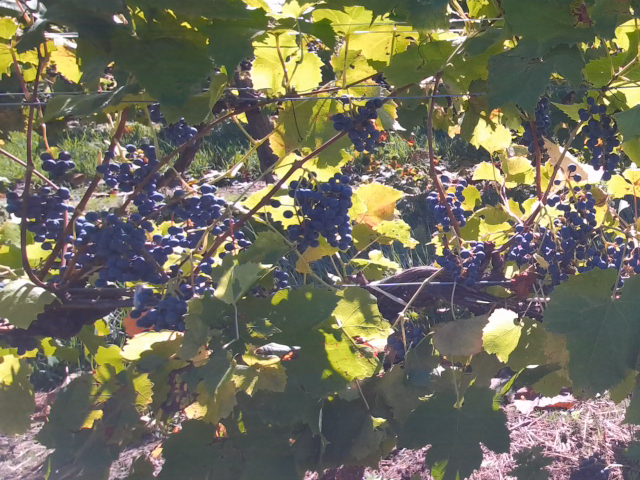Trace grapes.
<instances>
[{
  "label": "grapes",
  "instance_id": "grapes-1",
  "mask_svg": "<svg viewBox=\"0 0 640 480\" xmlns=\"http://www.w3.org/2000/svg\"><path fill=\"white\" fill-rule=\"evenodd\" d=\"M160 178L159 173H154L148 183L144 185V192L133 199V204L138 208V213L130 215L132 223L121 221L114 213L104 214V228L98 229L93 221L99 219L97 212H88L85 219H79L76 224L77 238L73 241L76 247L86 246L90 240L94 244L85 247V250L77 258L74 264L76 270L83 269L85 263L95 260L105 261L106 269L99 271V278L94 281L96 287H105L107 282L124 283L125 281L136 284L138 281L148 282L151 285H165L172 277L168 272L164 277L156 273L153 263H146L142 257H137L145 248L150 256L163 266L168 259L167 255L173 253V248L195 249L204 230L190 233L187 237L183 234L182 227L171 226L168 229L169 236L154 234L153 242H146V232L155 230L153 223L143 221L155 211L156 202H161L164 195L156 192V182Z\"/></svg>",
  "mask_w": 640,
  "mask_h": 480
},
{
  "label": "grapes",
  "instance_id": "grapes-2",
  "mask_svg": "<svg viewBox=\"0 0 640 480\" xmlns=\"http://www.w3.org/2000/svg\"><path fill=\"white\" fill-rule=\"evenodd\" d=\"M349 177L341 175L340 172L333 174L328 183H321L319 188L322 191H329L325 197L321 191H314L313 185L306 179L301 181L302 188L296 180H291L288 186L292 188L288 192L290 198L297 197L298 203L305 216L310 217L299 224H289L287 226V240L290 243L297 242V251L305 254L307 249L318 248L320 242L317 240L319 233L325 240H328L330 247H338L341 251H346L353 241L352 228L348 221L347 214L352 207L351 197L353 188L347 185ZM296 202V206H299Z\"/></svg>",
  "mask_w": 640,
  "mask_h": 480
},
{
  "label": "grapes",
  "instance_id": "grapes-3",
  "mask_svg": "<svg viewBox=\"0 0 640 480\" xmlns=\"http://www.w3.org/2000/svg\"><path fill=\"white\" fill-rule=\"evenodd\" d=\"M205 281L203 276H197L194 280V287L191 288L190 284L180 283L179 290L183 293L178 294L177 297H172L171 294L165 296L162 300V295L159 293H153V290L143 289L137 293V300L140 302V306L137 310H131L129 317L135 320V325L138 328L148 329L154 326L155 332H160L162 329H168L172 331H178L183 333L186 331V323L182 319V315H185L188 311V303L186 300L192 298L195 293L199 296H203L204 292H209L210 295L214 294V288L210 287L209 283H206L203 287L202 283Z\"/></svg>",
  "mask_w": 640,
  "mask_h": 480
},
{
  "label": "grapes",
  "instance_id": "grapes-4",
  "mask_svg": "<svg viewBox=\"0 0 640 480\" xmlns=\"http://www.w3.org/2000/svg\"><path fill=\"white\" fill-rule=\"evenodd\" d=\"M585 198L588 201H576L575 208L578 210L587 209L588 212L585 213V218L589 223H585V219L582 216H578L576 211H571L572 206L570 204L558 203L560 200L559 195H553L551 198L547 199V206L554 207L557 204V209L559 211H564V218L570 219L574 225H581V229L577 231H573L571 226H563L560 230L557 231V235L561 239L574 238L578 240L580 245L576 248V258L578 260H582L583 258L592 257V260L586 261V266H578V272H585L593 269L594 267H598L599 269H618L621 266V257L623 256L625 244L624 237L617 235L614 238V242L618 247V251H616L615 246L608 245L607 253L612 255V260L608 262L607 255L605 253L601 254L598 250H594L592 248H588L585 253V245L588 244V240L586 239V235H589L590 232L594 230V227L597 226L598 221L596 219L597 209L595 208L596 199L592 197L591 192L585 193Z\"/></svg>",
  "mask_w": 640,
  "mask_h": 480
},
{
  "label": "grapes",
  "instance_id": "grapes-5",
  "mask_svg": "<svg viewBox=\"0 0 640 480\" xmlns=\"http://www.w3.org/2000/svg\"><path fill=\"white\" fill-rule=\"evenodd\" d=\"M50 188L43 187L40 194H29L27 199L26 217L35 219L26 224V230L36 233L34 241L43 243L41 249L48 251L52 249L50 242L46 239L59 240L63 229V216L59 213L65 211L74 213L73 205H67L64 200L71 198V191L67 187H60L56 191V195H49Z\"/></svg>",
  "mask_w": 640,
  "mask_h": 480
},
{
  "label": "grapes",
  "instance_id": "grapes-6",
  "mask_svg": "<svg viewBox=\"0 0 640 480\" xmlns=\"http://www.w3.org/2000/svg\"><path fill=\"white\" fill-rule=\"evenodd\" d=\"M587 104L590 106L591 113H599L601 115L602 123L597 119L589 120V113L585 108H579L577 110V115L580 118L581 122H588L587 126H583L581 128V133L585 135L588 140L586 143V147L591 149L593 158L589 159V163L593 166L595 171H599L601 169V165L599 164L598 158L602 155V146L598 144V138L604 139L606 138V144L604 145V150L607 153H612L614 148H618L620 146V141L614 137V132L617 130L616 125H612L610 127L611 119L609 116H606L605 113L607 110V106L605 104H594V97L590 96L587 98ZM620 156L617 153H612L610 155V161L605 165V172L601 174V179L603 181H610L612 178V173L616 164L619 163Z\"/></svg>",
  "mask_w": 640,
  "mask_h": 480
},
{
  "label": "grapes",
  "instance_id": "grapes-7",
  "mask_svg": "<svg viewBox=\"0 0 640 480\" xmlns=\"http://www.w3.org/2000/svg\"><path fill=\"white\" fill-rule=\"evenodd\" d=\"M217 191L214 184L202 182L200 184L201 197H188L186 202L178 207L176 202L169 205V209L173 211L181 221L192 222V227L198 229L206 225H211L213 220L222 216L220 212L221 206L226 204L223 198L215 199L211 194Z\"/></svg>",
  "mask_w": 640,
  "mask_h": 480
},
{
  "label": "grapes",
  "instance_id": "grapes-8",
  "mask_svg": "<svg viewBox=\"0 0 640 480\" xmlns=\"http://www.w3.org/2000/svg\"><path fill=\"white\" fill-rule=\"evenodd\" d=\"M382 100H372L366 102V107H358V115L355 116L356 122L362 124L366 131L353 126L352 118L344 116L342 113H336L332 116L333 130L345 131L348 133L349 141L355 146L357 152H371L375 145V139L380 138V132L374 129L368 119H376L378 113L373 108H382Z\"/></svg>",
  "mask_w": 640,
  "mask_h": 480
},
{
  "label": "grapes",
  "instance_id": "grapes-9",
  "mask_svg": "<svg viewBox=\"0 0 640 480\" xmlns=\"http://www.w3.org/2000/svg\"><path fill=\"white\" fill-rule=\"evenodd\" d=\"M141 150L144 151L147 161H144V158L140 155L132 154L131 158L135 159L134 165L141 166L136 169L133 174L130 173L132 165L129 163L119 165L110 162L108 165H97L96 170L105 175L104 179L109 187H114L119 184L121 191L130 193L133 186L139 183L159 161V159L156 158L154 145L143 143Z\"/></svg>",
  "mask_w": 640,
  "mask_h": 480
},
{
  "label": "grapes",
  "instance_id": "grapes-10",
  "mask_svg": "<svg viewBox=\"0 0 640 480\" xmlns=\"http://www.w3.org/2000/svg\"><path fill=\"white\" fill-rule=\"evenodd\" d=\"M471 248L473 249L474 258L470 261L463 262V266L467 268L466 276L464 278H460L462 269L459 265H456V259L450 249H444V255L435 257L434 262L439 267H445L448 272H451V277L455 279L456 283H464L466 287H473L475 284V277L478 276L477 271L479 270V265L481 264V260L486 257V253L483 252V241H476L475 244L471 245Z\"/></svg>",
  "mask_w": 640,
  "mask_h": 480
},
{
  "label": "grapes",
  "instance_id": "grapes-11",
  "mask_svg": "<svg viewBox=\"0 0 640 480\" xmlns=\"http://www.w3.org/2000/svg\"><path fill=\"white\" fill-rule=\"evenodd\" d=\"M552 236V232L546 233L543 246L541 248V254L550 264L548 271L552 274V280L554 282H559L560 280L566 281L567 274L565 272H560L558 270V265L555 262L562 260V265L567 266L569 261H572L575 257L574 247L576 246V242L573 239L562 242L561 247L564 249V254H561L560 252L555 254L554 250L556 249V243L551 239Z\"/></svg>",
  "mask_w": 640,
  "mask_h": 480
},
{
  "label": "grapes",
  "instance_id": "grapes-12",
  "mask_svg": "<svg viewBox=\"0 0 640 480\" xmlns=\"http://www.w3.org/2000/svg\"><path fill=\"white\" fill-rule=\"evenodd\" d=\"M148 113L154 123H161L163 127V133L165 137L172 142L173 146H179L184 140L194 136L198 129L196 127L188 126L184 118H181L179 122L174 124L169 123L161 116L160 103L148 104Z\"/></svg>",
  "mask_w": 640,
  "mask_h": 480
},
{
  "label": "grapes",
  "instance_id": "grapes-13",
  "mask_svg": "<svg viewBox=\"0 0 640 480\" xmlns=\"http://www.w3.org/2000/svg\"><path fill=\"white\" fill-rule=\"evenodd\" d=\"M523 231V225L516 226L515 232L519 234L515 236V243L510 247V252L507 255V260L515 261L517 267L527 264L529 262V258L525 255L534 251V248L530 247L529 243L533 240V234L523 233Z\"/></svg>",
  "mask_w": 640,
  "mask_h": 480
},
{
  "label": "grapes",
  "instance_id": "grapes-14",
  "mask_svg": "<svg viewBox=\"0 0 640 480\" xmlns=\"http://www.w3.org/2000/svg\"><path fill=\"white\" fill-rule=\"evenodd\" d=\"M40 159L44 161L41 170L53 172L57 176H63L65 169L72 170L76 167V163L72 161L70 151L59 152L57 159L54 160L51 159V155L48 152H44L40 155Z\"/></svg>",
  "mask_w": 640,
  "mask_h": 480
},
{
  "label": "grapes",
  "instance_id": "grapes-15",
  "mask_svg": "<svg viewBox=\"0 0 640 480\" xmlns=\"http://www.w3.org/2000/svg\"><path fill=\"white\" fill-rule=\"evenodd\" d=\"M457 185L458 187L456 188L455 193L446 194V201L448 205L452 208L454 219L459 224V227H465L466 220H465V216L463 215L465 213V209L461 206H462V202L465 201V196L462 195V191H463V188L468 185V181L466 179H460L457 182Z\"/></svg>",
  "mask_w": 640,
  "mask_h": 480
},
{
  "label": "grapes",
  "instance_id": "grapes-16",
  "mask_svg": "<svg viewBox=\"0 0 640 480\" xmlns=\"http://www.w3.org/2000/svg\"><path fill=\"white\" fill-rule=\"evenodd\" d=\"M549 99L544 98L537 105L536 111V127H537V138L540 147L544 146V137L548 136V131L551 126L550 115L546 114L545 111L548 110Z\"/></svg>",
  "mask_w": 640,
  "mask_h": 480
},
{
  "label": "grapes",
  "instance_id": "grapes-17",
  "mask_svg": "<svg viewBox=\"0 0 640 480\" xmlns=\"http://www.w3.org/2000/svg\"><path fill=\"white\" fill-rule=\"evenodd\" d=\"M437 197H438V194L434 191H431L427 195V197L425 198V201L427 203V208L430 209L431 211H435V215H434L435 221L439 224H442L443 232H448L449 227L451 225L449 223L448 217L443 214L446 211V209H444L442 205H439V203L437 202Z\"/></svg>",
  "mask_w": 640,
  "mask_h": 480
},
{
  "label": "grapes",
  "instance_id": "grapes-18",
  "mask_svg": "<svg viewBox=\"0 0 640 480\" xmlns=\"http://www.w3.org/2000/svg\"><path fill=\"white\" fill-rule=\"evenodd\" d=\"M625 255L627 257H631L633 255V257L632 260H625L624 264L633 268L635 273H640V265H637L638 260L640 259V247L635 248V242L628 240Z\"/></svg>",
  "mask_w": 640,
  "mask_h": 480
},
{
  "label": "grapes",
  "instance_id": "grapes-19",
  "mask_svg": "<svg viewBox=\"0 0 640 480\" xmlns=\"http://www.w3.org/2000/svg\"><path fill=\"white\" fill-rule=\"evenodd\" d=\"M6 201L8 206L6 207L7 213H14V216L21 218V206L22 202H19V196L17 193H7Z\"/></svg>",
  "mask_w": 640,
  "mask_h": 480
},
{
  "label": "grapes",
  "instance_id": "grapes-20",
  "mask_svg": "<svg viewBox=\"0 0 640 480\" xmlns=\"http://www.w3.org/2000/svg\"><path fill=\"white\" fill-rule=\"evenodd\" d=\"M523 126L526 128V131L523 133L522 144L527 147V151L529 153H534V145L532 140V130L531 126L528 122H524Z\"/></svg>",
  "mask_w": 640,
  "mask_h": 480
},
{
  "label": "grapes",
  "instance_id": "grapes-21",
  "mask_svg": "<svg viewBox=\"0 0 640 480\" xmlns=\"http://www.w3.org/2000/svg\"><path fill=\"white\" fill-rule=\"evenodd\" d=\"M273 275L278 279L276 282V286L278 288L285 287L287 285V280L289 279V274L283 270H275Z\"/></svg>",
  "mask_w": 640,
  "mask_h": 480
},
{
  "label": "grapes",
  "instance_id": "grapes-22",
  "mask_svg": "<svg viewBox=\"0 0 640 480\" xmlns=\"http://www.w3.org/2000/svg\"><path fill=\"white\" fill-rule=\"evenodd\" d=\"M233 238L236 240V243L242 248H250L252 243L249 240H245V234L242 230L237 231L233 234Z\"/></svg>",
  "mask_w": 640,
  "mask_h": 480
},
{
  "label": "grapes",
  "instance_id": "grapes-23",
  "mask_svg": "<svg viewBox=\"0 0 640 480\" xmlns=\"http://www.w3.org/2000/svg\"><path fill=\"white\" fill-rule=\"evenodd\" d=\"M229 226H230V219L229 218H225L224 221H223V224L214 225L212 227L211 234L213 236H216L218 233H222L223 231H225Z\"/></svg>",
  "mask_w": 640,
  "mask_h": 480
},
{
  "label": "grapes",
  "instance_id": "grapes-24",
  "mask_svg": "<svg viewBox=\"0 0 640 480\" xmlns=\"http://www.w3.org/2000/svg\"><path fill=\"white\" fill-rule=\"evenodd\" d=\"M73 253H74V250H73V249H71V248H68V249H67V252H65V253H64L63 258H64L65 260H70V259H71V257H72V255H73Z\"/></svg>",
  "mask_w": 640,
  "mask_h": 480
}]
</instances>
